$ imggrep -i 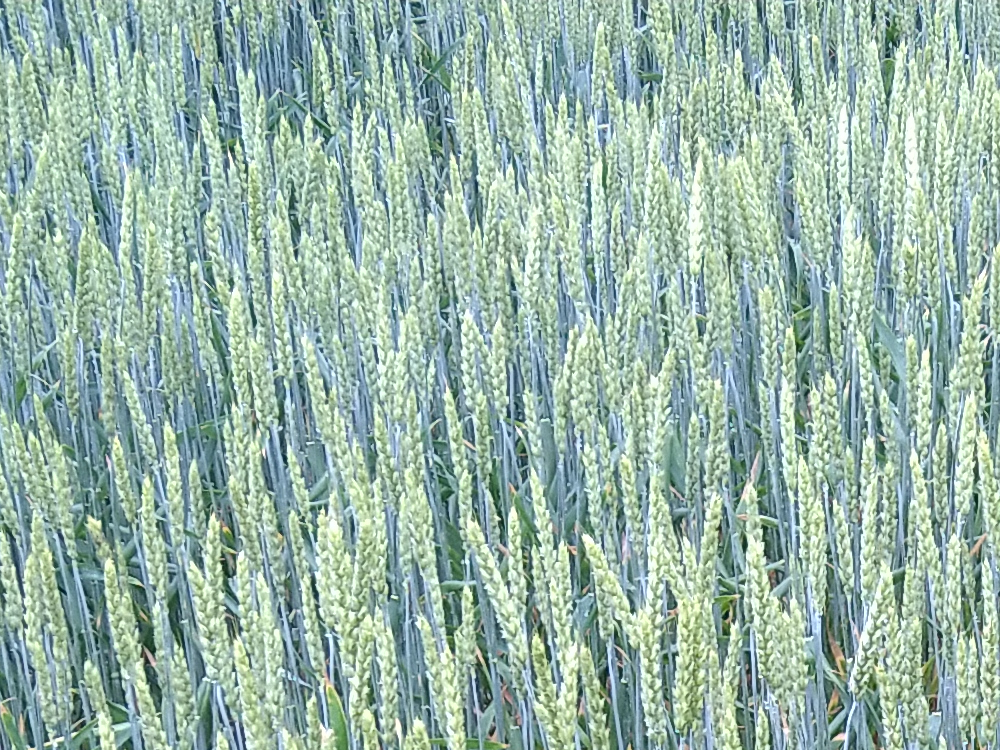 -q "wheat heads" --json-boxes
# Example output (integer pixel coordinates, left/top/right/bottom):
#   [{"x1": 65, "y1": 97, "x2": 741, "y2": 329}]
[
  {"x1": 152, "y1": 132, "x2": 171, "y2": 186},
  {"x1": 228, "y1": 478, "x2": 263, "y2": 569},
  {"x1": 954, "y1": 139, "x2": 971, "y2": 214},
  {"x1": 696, "y1": 56, "x2": 700, "y2": 84},
  {"x1": 883, "y1": 393, "x2": 897, "y2": 465},
  {"x1": 547, "y1": 184, "x2": 567, "y2": 230},
  {"x1": 579, "y1": 5, "x2": 589, "y2": 64},
  {"x1": 22, "y1": 168, "x2": 49, "y2": 254},
  {"x1": 534, "y1": 43, "x2": 543, "y2": 103},
  {"x1": 674, "y1": 603, "x2": 695, "y2": 729},
  {"x1": 158, "y1": 0, "x2": 172, "y2": 61},
  {"x1": 513, "y1": 1, "x2": 524, "y2": 49},
  {"x1": 893, "y1": 0, "x2": 898, "y2": 37},
  {"x1": 615, "y1": 459, "x2": 644, "y2": 553},
  {"x1": 227, "y1": 293, "x2": 251, "y2": 414},
  {"x1": 931, "y1": 0, "x2": 959, "y2": 29},
  {"x1": 670, "y1": 151, "x2": 678, "y2": 179},
  {"x1": 860, "y1": 482, "x2": 876, "y2": 599},
  {"x1": 377, "y1": 0, "x2": 390, "y2": 26},
  {"x1": 810, "y1": 3, "x2": 821, "y2": 35},
  {"x1": 460, "y1": 470, "x2": 471, "y2": 527},
  {"x1": 518, "y1": 73, "x2": 537, "y2": 148},
  {"x1": 550, "y1": 369, "x2": 570, "y2": 454},
  {"x1": 863, "y1": 122, "x2": 878, "y2": 198},
  {"x1": 444, "y1": 219, "x2": 451, "y2": 285},
  {"x1": 355, "y1": 304, "x2": 380, "y2": 387},
  {"x1": 582, "y1": 648, "x2": 610, "y2": 750},
  {"x1": 784, "y1": 327, "x2": 797, "y2": 383},
  {"x1": 12, "y1": 276, "x2": 28, "y2": 380},
  {"x1": 680, "y1": 98, "x2": 692, "y2": 161},
  {"x1": 959, "y1": 67, "x2": 970, "y2": 120},
  {"x1": 545, "y1": 100, "x2": 564, "y2": 205},
  {"x1": 5, "y1": 60, "x2": 26, "y2": 164},
  {"x1": 311, "y1": 202, "x2": 325, "y2": 258},
  {"x1": 0, "y1": 457, "x2": 18, "y2": 534},
  {"x1": 770, "y1": 280, "x2": 785, "y2": 351},
  {"x1": 654, "y1": 350, "x2": 678, "y2": 482},
  {"x1": 833, "y1": 500, "x2": 855, "y2": 590},
  {"x1": 477, "y1": 397, "x2": 491, "y2": 481},
  {"x1": 461, "y1": 311, "x2": 480, "y2": 408},
  {"x1": 718, "y1": 65, "x2": 730, "y2": 134},
  {"x1": 210, "y1": 355, "x2": 222, "y2": 408},
  {"x1": 669, "y1": 175, "x2": 690, "y2": 263},
  {"x1": 578, "y1": 424, "x2": 600, "y2": 534},
  {"x1": 399, "y1": 250, "x2": 423, "y2": 310},
  {"x1": 297, "y1": 230, "x2": 312, "y2": 299},
  {"x1": 145, "y1": 0, "x2": 158, "y2": 64},
  {"x1": 622, "y1": 391, "x2": 631, "y2": 459},
  {"x1": 850, "y1": 568, "x2": 895, "y2": 691},
  {"x1": 115, "y1": 552, "x2": 141, "y2": 651},
  {"x1": 629, "y1": 118, "x2": 645, "y2": 190},
  {"x1": 972, "y1": 71, "x2": 992, "y2": 189},
  {"x1": 538, "y1": 701, "x2": 572, "y2": 750},
  {"x1": 487, "y1": 42, "x2": 495, "y2": 101},
  {"x1": 955, "y1": 397, "x2": 977, "y2": 514},
  {"x1": 168, "y1": 20, "x2": 186, "y2": 100},
  {"x1": 405, "y1": 305, "x2": 422, "y2": 398},
  {"x1": 911, "y1": 59, "x2": 919, "y2": 114},
  {"x1": 50, "y1": 44, "x2": 63, "y2": 79},
  {"x1": 523, "y1": 0, "x2": 535, "y2": 65},
  {"x1": 558, "y1": 661, "x2": 579, "y2": 737},
  {"x1": 903, "y1": 542, "x2": 925, "y2": 617},
  {"x1": 689, "y1": 80, "x2": 705, "y2": 164},
  {"x1": 451, "y1": 155, "x2": 462, "y2": 204},
  {"x1": 205, "y1": 518, "x2": 220, "y2": 633},
  {"x1": 874, "y1": 0, "x2": 885, "y2": 40},
  {"x1": 22, "y1": 555, "x2": 42, "y2": 655},
  {"x1": 640, "y1": 104, "x2": 650, "y2": 141},
  {"x1": 809, "y1": 390, "x2": 825, "y2": 479},
  {"x1": 877, "y1": 140, "x2": 898, "y2": 223},
  {"x1": 836, "y1": 45, "x2": 847, "y2": 107},
  {"x1": 348, "y1": 525, "x2": 372, "y2": 629},
  {"x1": 271, "y1": 275, "x2": 292, "y2": 373},
  {"x1": 545, "y1": 576, "x2": 571, "y2": 649},
  {"x1": 364, "y1": 510, "x2": 389, "y2": 609},
  {"x1": 753, "y1": 707, "x2": 771, "y2": 750},
  {"x1": 797, "y1": 183, "x2": 817, "y2": 260},
  {"x1": 0, "y1": 534, "x2": 24, "y2": 634},
  {"x1": 403, "y1": 472, "x2": 432, "y2": 569},
  {"x1": 464, "y1": 583, "x2": 473, "y2": 645},
  {"x1": 457, "y1": 471, "x2": 470, "y2": 543},
  {"x1": 444, "y1": 658, "x2": 467, "y2": 750},
  {"x1": 460, "y1": 99, "x2": 474, "y2": 202},
  {"x1": 52, "y1": 79, "x2": 71, "y2": 148},
  {"x1": 859, "y1": 441, "x2": 875, "y2": 506},
  {"x1": 933, "y1": 425, "x2": 949, "y2": 524},
  {"x1": 185, "y1": 562, "x2": 219, "y2": 679},
  {"x1": 985, "y1": 0, "x2": 1000, "y2": 29},
  {"x1": 176, "y1": 0, "x2": 197, "y2": 45},
  {"x1": 141, "y1": 477, "x2": 166, "y2": 592},
  {"x1": 173, "y1": 187, "x2": 186, "y2": 275},
  {"x1": 623, "y1": 305, "x2": 638, "y2": 391},
  {"x1": 860, "y1": 240, "x2": 875, "y2": 329},
  {"x1": 227, "y1": 152, "x2": 243, "y2": 236},
  {"x1": 645, "y1": 134, "x2": 657, "y2": 223},
  {"x1": 160, "y1": 306, "x2": 177, "y2": 389},
  {"x1": 132, "y1": 666, "x2": 182, "y2": 750},
  {"x1": 239, "y1": 70, "x2": 254, "y2": 159},
  {"x1": 507, "y1": 162, "x2": 513, "y2": 192},
  {"x1": 69, "y1": 84, "x2": 87, "y2": 171},
  {"x1": 605, "y1": 80, "x2": 619, "y2": 137},
  {"x1": 472, "y1": 225, "x2": 493, "y2": 320},
  {"x1": 392, "y1": 0, "x2": 404, "y2": 32},
  {"x1": 468, "y1": 1, "x2": 479, "y2": 46},
  {"x1": 313, "y1": 261, "x2": 343, "y2": 367},
  {"x1": 660, "y1": 180, "x2": 677, "y2": 266},
  {"x1": 427, "y1": 540, "x2": 448, "y2": 638},
  {"x1": 705, "y1": 252, "x2": 722, "y2": 311},
  {"x1": 693, "y1": 161, "x2": 708, "y2": 274},
  {"x1": 791, "y1": 4, "x2": 807, "y2": 36},
  {"x1": 402, "y1": 386, "x2": 416, "y2": 431},
  {"x1": 152, "y1": 603, "x2": 169, "y2": 688},
  {"x1": 611, "y1": 55, "x2": 626, "y2": 94},
  {"x1": 325, "y1": 187, "x2": 340, "y2": 244},
  {"x1": 443, "y1": 392, "x2": 465, "y2": 473},
  {"x1": 473, "y1": 90, "x2": 495, "y2": 192},
  {"x1": 891, "y1": 159, "x2": 899, "y2": 276},
  {"x1": 884, "y1": 466, "x2": 891, "y2": 564},
  {"x1": 645, "y1": 3, "x2": 665, "y2": 70},
  {"x1": 573, "y1": 100, "x2": 587, "y2": 214},
  {"x1": 748, "y1": 542, "x2": 769, "y2": 680},
  {"x1": 340, "y1": 298, "x2": 357, "y2": 386},
  {"x1": 100, "y1": 326, "x2": 117, "y2": 428},
  {"x1": 903, "y1": 336, "x2": 919, "y2": 427},
  {"x1": 949, "y1": 24, "x2": 962, "y2": 108},
  {"x1": 990, "y1": 402, "x2": 1000, "y2": 488},
  {"x1": 350, "y1": 623, "x2": 375, "y2": 723},
  {"x1": 699, "y1": 495, "x2": 723, "y2": 590},
  {"x1": 530, "y1": 176, "x2": 540, "y2": 209},
  {"x1": 81, "y1": 661, "x2": 110, "y2": 719},
  {"x1": 30, "y1": 512, "x2": 47, "y2": 550},
  {"x1": 728, "y1": 13, "x2": 733, "y2": 59},
  {"x1": 374, "y1": 253, "x2": 396, "y2": 361},
  {"x1": 606, "y1": 534, "x2": 620, "y2": 575},
  {"x1": 287, "y1": 133, "x2": 307, "y2": 200},
  {"x1": 372, "y1": 318, "x2": 397, "y2": 406},
  {"x1": 61, "y1": 0, "x2": 83, "y2": 64},
  {"x1": 824, "y1": 377, "x2": 843, "y2": 467},
  {"x1": 377, "y1": 126, "x2": 388, "y2": 188},
  {"x1": 631, "y1": 188, "x2": 641, "y2": 231},
  {"x1": 50, "y1": 446, "x2": 77, "y2": 556},
  {"x1": 372, "y1": 402, "x2": 397, "y2": 501},
  {"x1": 556, "y1": 93, "x2": 570, "y2": 156},
  {"x1": 267, "y1": 0, "x2": 285, "y2": 25},
  {"x1": 236, "y1": 553, "x2": 259, "y2": 662},
  {"x1": 678, "y1": 141, "x2": 689, "y2": 186},
  {"x1": 118, "y1": 0, "x2": 126, "y2": 21},
  {"x1": 626, "y1": 228, "x2": 638, "y2": 264},
  {"x1": 449, "y1": 57, "x2": 467, "y2": 126},
  {"x1": 860, "y1": 82, "x2": 872, "y2": 176},
  {"x1": 757, "y1": 387, "x2": 774, "y2": 463},
  {"x1": 376, "y1": 613, "x2": 400, "y2": 740},
  {"x1": 70, "y1": 331, "x2": 79, "y2": 417},
  {"x1": 30, "y1": 647, "x2": 59, "y2": 734},
  {"x1": 826, "y1": 72, "x2": 837, "y2": 121},
  {"x1": 252, "y1": 341, "x2": 280, "y2": 424},
  {"x1": 637, "y1": 236, "x2": 654, "y2": 320},
  {"x1": 903, "y1": 621, "x2": 928, "y2": 743},
  {"x1": 350, "y1": 105, "x2": 363, "y2": 209},
  {"x1": 763, "y1": 87, "x2": 782, "y2": 164},
  {"x1": 645, "y1": 489, "x2": 667, "y2": 616},
  {"x1": 454, "y1": 202, "x2": 477, "y2": 306},
  {"x1": 452, "y1": 631, "x2": 471, "y2": 701},
  {"x1": 346, "y1": 256, "x2": 364, "y2": 304},
  {"x1": 759, "y1": 289, "x2": 776, "y2": 379},
  {"x1": 591, "y1": 326, "x2": 603, "y2": 411},
  {"x1": 864, "y1": 43, "x2": 887, "y2": 118},
  {"x1": 405, "y1": 123, "x2": 419, "y2": 182},
  {"x1": 970, "y1": 0, "x2": 978, "y2": 50},
  {"x1": 333, "y1": 42, "x2": 347, "y2": 107},
  {"x1": 319, "y1": 51, "x2": 339, "y2": 128},
  {"x1": 143, "y1": 74, "x2": 178, "y2": 153},
  {"x1": 560, "y1": 225, "x2": 585, "y2": 302},
  {"x1": 67, "y1": 458, "x2": 86, "y2": 523},
  {"x1": 307, "y1": 696, "x2": 327, "y2": 750},
  {"x1": 756, "y1": 81, "x2": 768, "y2": 167},
  {"x1": 190, "y1": 460, "x2": 205, "y2": 537},
  {"x1": 708, "y1": 383, "x2": 729, "y2": 485},
  {"x1": 766, "y1": 597, "x2": 789, "y2": 698},
  {"x1": 564, "y1": 1, "x2": 574, "y2": 38},
  {"x1": 557, "y1": 128, "x2": 568, "y2": 207},
  {"x1": 910, "y1": 449, "x2": 928, "y2": 551},
  {"x1": 880, "y1": 675, "x2": 908, "y2": 750},
  {"x1": 53, "y1": 320, "x2": 68, "y2": 371},
  {"x1": 869, "y1": 344, "x2": 892, "y2": 390},
  {"x1": 717, "y1": 711, "x2": 745, "y2": 750},
  {"x1": 273, "y1": 198, "x2": 307, "y2": 308},
  {"x1": 692, "y1": 7, "x2": 701, "y2": 54},
  {"x1": 121, "y1": 373, "x2": 158, "y2": 466},
  {"x1": 212, "y1": 624, "x2": 240, "y2": 706},
  {"x1": 797, "y1": 0, "x2": 810, "y2": 33},
  {"x1": 592, "y1": 24, "x2": 608, "y2": 101},
  {"x1": 813, "y1": 33, "x2": 827, "y2": 110},
  {"x1": 197, "y1": 0, "x2": 216, "y2": 47},
  {"x1": 288, "y1": 447, "x2": 311, "y2": 520},
  {"x1": 773, "y1": 69, "x2": 803, "y2": 159},
  {"x1": 160, "y1": 274, "x2": 182, "y2": 340},
  {"x1": 656, "y1": 495, "x2": 684, "y2": 590},
  {"x1": 235, "y1": 144, "x2": 247, "y2": 187},
  {"x1": 88, "y1": 519, "x2": 110, "y2": 562},
  {"x1": 302, "y1": 338, "x2": 332, "y2": 440},
  {"x1": 248, "y1": 249, "x2": 269, "y2": 343},
  {"x1": 35, "y1": 397, "x2": 51, "y2": 462},
  {"x1": 814, "y1": 306, "x2": 824, "y2": 374},
  {"x1": 684, "y1": 540, "x2": 700, "y2": 592},
  {"x1": 373, "y1": 476, "x2": 388, "y2": 523},
  {"x1": 617, "y1": 118, "x2": 629, "y2": 180},
  {"x1": 80, "y1": 0, "x2": 97, "y2": 46},
  {"x1": 28, "y1": 0, "x2": 45, "y2": 37},
  {"x1": 723, "y1": 622, "x2": 740, "y2": 699},
  {"x1": 0, "y1": 410, "x2": 13, "y2": 485},
  {"x1": 364, "y1": 0, "x2": 379, "y2": 82},
  {"x1": 520, "y1": 198, "x2": 545, "y2": 305},
  {"x1": 533, "y1": 141, "x2": 544, "y2": 208},
  {"x1": 411, "y1": 21, "x2": 424, "y2": 65},
  {"x1": 55, "y1": 646, "x2": 72, "y2": 715},
  {"x1": 394, "y1": 134, "x2": 408, "y2": 239},
  {"x1": 382, "y1": 54, "x2": 394, "y2": 111},
  {"x1": 702, "y1": 3, "x2": 718, "y2": 46},
  {"x1": 991, "y1": 247, "x2": 1000, "y2": 334},
  {"x1": 605, "y1": 311, "x2": 617, "y2": 391},
  {"x1": 220, "y1": 422, "x2": 232, "y2": 471},
  {"x1": 0, "y1": 83, "x2": 4, "y2": 137},
  {"x1": 360, "y1": 710, "x2": 387, "y2": 750},
  {"x1": 427, "y1": 214, "x2": 441, "y2": 301},
  {"x1": 407, "y1": 412, "x2": 426, "y2": 492},
  {"x1": 819, "y1": 0, "x2": 830, "y2": 37},
  {"x1": 96, "y1": 143, "x2": 121, "y2": 204},
  {"x1": 0, "y1": 131, "x2": 9, "y2": 192},
  {"x1": 323, "y1": 160, "x2": 338, "y2": 187},
  {"x1": 978, "y1": 0, "x2": 990, "y2": 54},
  {"x1": 79, "y1": 66, "x2": 94, "y2": 117},
  {"x1": 632, "y1": 358, "x2": 653, "y2": 469},
  {"x1": 958, "y1": 54, "x2": 985, "y2": 153},
  {"x1": 591, "y1": 162, "x2": 604, "y2": 267},
  {"x1": 905, "y1": 117, "x2": 921, "y2": 242},
  {"x1": 904, "y1": 0, "x2": 917, "y2": 35},
  {"x1": 532, "y1": 634, "x2": 555, "y2": 710},
  {"x1": 263, "y1": 499, "x2": 287, "y2": 578},
  {"x1": 508, "y1": 508, "x2": 524, "y2": 604},
  {"x1": 843, "y1": 240, "x2": 867, "y2": 330},
  {"x1": 122, "y1": 263, "x2": 136, "y2": 339},
  {"x1": 512, "y1": 255, "x2": 524, "y2": 308},
  {"x1": 800, "y1": 36, "x2": 813, "y2": 113},
  {"x1": 329, "y1": 516, "x2": 341, "y2": 578},
  {"x1": 401, "y1": 59, "x2": 416, "y2": 115},
  {"x1": 774, "y1": 0, "x2": 791, "y2": 37},
  {"x1": 934, "y1": 115, "x2": 953, "y2": 220},
  {"x1": 481, "y1": 183, "x2": 500, "y2": 274},
  {"x1": 360, "y1": 115, "x2": 378, "y2": 173},
  {"x1": 744, "y1": 489, "x2": 758, "y2": 543},
  {"x1": 261, "y1": 1, "x2": 272, "y2": 34},
  {"x1": 911, "y1": 89, "x2": 927, "y2": 163},
  {"x1": 543, "y1": 27, "x2": 553, "y2": 59},
  {"x1": 34, "y1": 31, "x2": 52, "y2": 89},
  {"x1": 694, "y1": 344, "x2": 702, "y2": 400},
  {"x1": 810, "y1": 118, "x2": 822, "y2": 165},
  {"x1": 164, "y1": 422, "x2": 184, "y2": 540},
  {"x1": 111, "y1": 439, "x2": 135, "y2": 521},
  {"x1": 51, "y1": 154, "x2": 74, "y2": 231},
  {"x1": 245, "y1": 0, "x2": 260, "y2": 56},
  {"x1": 418, "y1": 114, "x2": 435, "y2": 200},
  {"x1": 103, "y1": 561, "x2": 126, "y2": 664},
  {"x1": 409, "y1": 161, "x2": 426, "y2": 226},
  {"x1": 530, "y1": 473, "x2": 556, "y2": 562},
  {"x1": 592, "y1": 426, "x2": 620, "y2": 510},
  {"x1": 496, "y1": 63, "x2": 524, "y2": 151},
  {"x1": 583, "y1": 536, "x2": 635, "y2": 643},
  {"x1": 840, "y1": 111, "x2": 848, "y2": 198},
  {"x1": 78, "y1": 235, "x2": 91, "y2": 334},
  {"x1": 833, "y1": 0, "x2": 843, "y2": 42},
  {"x1": 903, "y1": 501, "x2": 921, "y2": 564},
  {"x1": 124, "y1": 100, "x2": 152, "y2": 165},
  {"x1": 700, "y1": 311, "x2": 716, "y2": 352},
  {"x1": 789, "y1": 603, "x2": 808, "y2": 693},
  {"x1": 613, "y1": 6, "x2": 623, "y2": 59},
  {"x1": 982, "y1": 558, "x2": 998, "y2": 640},
  {"x1": 543, "y1": 234, "x2": 562, "y2": 299},
  {"x1": 191, "y1": 263, "x2": 212, "y2": 348},
  {"x1": 465, "y1": 523, "x2": 523, "y2": 648},
  {"x1": 588, "y1": 118, "x2": 597, "y2": 161},
  {"x1": 428, "y1": 361, "x2": 438, "y2": 397},
  {"x1": 506, "y1": 58, "x2": 516, "y2": 104},
  {"x1": 843, "y1": 12, "x2": 861, "y2": 65},
  {"x1": 778, "y1": 36, "x2": 794, "y2": 76},
  {"x1": 24, "y1": 49, "x2": 45, "y2": 144},
  {"x1": 288, "y1": 513, "x2": 310, "y2": 581},
  {"x1": 492, "y1": 320, "x2": 505, "y2": 414},
  {"x1": 810, "y1": 498, "x2": 822, "y2": 609},
  {"x1": 742, "y1": 167, "x2": 775, "y2": 256},
  {"x1": 130, "y1": 1, "x2": 140, "y2": 36},
  {"x1": 177, "y1": 142, "x2": 185, "y2": 184},
  {"x1": 709, "y1": 73, "x2": 719, "y2": 139},
  {"x1": 640, "y1": 260, "x2": 654, "y2": 327},
  {"x1": 234, "y1": 641, "x2": 270, "y2": 750},
  {"x1": 969, "y1": 196, "x2": 983, "y2": 277},
  {"x1": 277, "y1": 112, "x2": 290, "y2": 201},
  {"x1": 529, "y1": 550, "x2": 551, "y2": 627},
  {"x1": 113, "y1": 100, "x2": 127, "y2": 178},
  {"x1": 694, "y1": 601, "x2": 715, "y2": 699},
  {"x1": 917, "y1": 348, "x2": 932, "y2": 456},
  {"x1": 622, "y1": 4, "x2": 638, "y2": 62},
  {"x1": 717, "y1": 277, "x2": 732, "y2": 348},
  {"x1": 144, "y1": 223, "x2": 161, "y2": 333},
  {"x1": 455, "y1": 0, "x2": 460, "y2": 34},
  {"x1": 676, "y1": 306, "x2": 701, "y2": 368},
  {"x1": 256, "y1": 98, "x2": 268, "y2": 148},
  {"x1": 247, "y1": 162, "x2": 265, "y2": 264},
  {"x1": 117, "y1": 173, "x2": 133, "y2": 261},
  {"x1": 260, "y1": 140, "x2": 273, "y2": 196},
  {"x1": 420, "y1": 618, "x2": 443, "y2": 730},
  {"x1": 504, "y1": 4, "x2": 530, "y2": 86},
  {"x1": 364, "y1": 204, "x2": 386, "y2": 275},
  {"x1": 177, "y1": 318, "x2": 192, "y2": 397},
  {"x1": 302, "y1": 110, "x2": 311, "y2": 143},
  {"x1": 943, "y1": 539, "x2": 963, "y2": 630},
  {"x1": 156, "y1": 182, "x2": 167, "y2": 264},
  {"x1": 751, "y1": 112, "x2": 761, "y2": 161},
  {"x1": 190, "y1": 142, "x2": 198, "y2": 206},
  {"x1": 313, "y1": 37, "x2": 321, "y2": 104},
  {"x1": 610, "y1": 205, "x2": 625, "y2": 288},
  {"x1": 675, "y1": 43, "x2": 687, "y2": 89},
  {"x1": 710, "y1": 651, "x2": 720, "y2": 728},
  {"x1": 302, "y1": 140, "x2": 324, "y2": 223},
  {"x1": 205, "y1": 213, "x2": 230, "y2": 293},
  {"x1": 41, "y1": 553, "x2": 68, "y2": 655},
  {"x1": 136, "y1": 182, "x2": 149, "y2": 261},
  {"x1": 733, "y1": 286, "x2": 742, "y2": 339},
  {"x1": 775, "y1": 34, "x2": 784, "y2": 67},
  {"x1": 887, "y1": 43, "x2": 909, "y2": 141},
  {"x1": 594, "y1": 569, "x2": 616, "y2": 642},
  {"x1": 961, "y1": 0, "x2": 968, "y2": 32},
  {"x1": 626, "y1": 100, "x2": 634, "y2": 137},
  {"x1": 687, "y1": 415, "x2": 701, "y2": 516},
  {"x1": 93, "y1": 43, "x2": 111, "y2": 115},
  {"x1": 334, "y1": 337, "x2": 353, "y2": 406},
  {"x1": 395, "y1": 494, "x2": 413, "y2": 579},
  {"x1": 829, "y1": 284, "x2": 842, "y2": 365},
  {"x1": 658, "y1": 3, "x2": 674, "y2": 40},
  {"x1": 746, "y1": 2, "x2": 757, "y2": 73},
  {"x1": 928, "y1": 544, "x2": 943, "y2": 625},
  {"x1": 930, "y1": 65, "x2": 945, "y2": 154},
  {"x1": 613, "y1": 269, "x2": 633, "y2": 363},
  {"x1": 714, "y1": 178, "x2": 730, "y2": 251},
  {"x1": 858, "y1": 5, "x2": 869, "y2": 64},
  {"x1": 264, "y1": 215, "x2": 283, "y2": 278},
  {"x1": 791, "y1": 148, "x2": 803, "y2": 180},
  {"x1": 272, "y1": 137, "x2": 282, "y2": 184},
  {"x1": 919, "y1": 235, "x2": 932, "y2": 333},
  {"x1": 977, "y1": 434, "x2": 1000, "y2": 556},
  {"x1": 328, "y1": 412, "x2": 364, "y2": 515},
  {"x1": 495, "y1": 179, "x2": 524, "y2": 266},
  {"x1": 249, "y1": 446, "x2": 267, "y2": 527},
  {"x1": 854, "y1": 331, "x2": 876, "y2": 417},
  {"x1": 476, "y1": 334, "x2": 494, "y2": 395},
  {"x1": 559, "y1": 543, "x2": 574, "y2": 620},
  {"x1": 352, "y1": 441, "x2": 371, "y2": 516},
  {"x1": 845, "y1": 222, "x2": 852, "y2": 285},
  {"x1": 898, "y1": 237, "x2": 916, "y2": 327},
  {"x1": 956, "y1": 637, "x2": 978, "y2": 737},
  {"x1": 183, "y1": 179, "x2": 200, "y2": 260},
  {"x1": 922, "y1": 197, "x2": 940, "y2": 306},
  {"x1": 524, "y1": 391, "x2": 544, "y2": 470},
  {"x1": 658, "y1": 45, "x2": 679, "y2": 131},
  {"x1": 782, "y1": 35, "x2": 791, "y2": 81},
  {"x1": 495, "y1": 220, "x2": 513, "y2": 318},
  {"x1": 813, "y1": 171, "x2": 833, "y2": 245},
  {"x1": 568, "y1": 0, "x2": 582, "y2": 64},
  {"x1": 350, "y1": 442, "x2": 376, "y2": 509},
  {"x1": 117, "y1": 26, "x2": 136, "y2": 89},
  {"x1": 564, "y1": 325, "x2": 579, "y2": 399},
  {"x1": 233, "y1": 406, "x2": 249, "y2": 491},
  {"x1": 638, "y1": 610, "x2": 661, "y2": 739},
  {"x1": 74, "y1": 165, "x2": 96, "y2": 233},
  {"x1": 99, "y1": 14, "x2": 116, "y2": 73},
  {"x1": 469, "y1": 24, "x2": 475, "y2": 84},
  {"x1": 992, "y1": 25, "x2": 1000, "y2": 66},
  {"x1": 925, "y1": 12, "x2": 948, "y2": 71},
  {"x1": 957, "y1": 279, "x2": 986, "y2": 392},
  {"x1": 532, "y1": 0, "x2": 546, "y2": 38},
  {"x1": 414, "y1": 722, "x2": 441, "y2": 750},
  {"x1": 669, "y1": 277, "x2": 684, "y2": 368},
  {"x1": 607, "y1": 145, "x2": 620, "y2": 207},
  {"x1": 54, "y1": 228, "x2": 71, "y2": 322},
  {"x1": 26, "y1": 431, "x2": 49, "y2": 506},
  {"x1": 99, "y1": 1, "x2": 112, "y2": 22},
  {"x1": 727, "y1": 7, "x2": 747, "y2": 48},
  {"x1": 982, "y1": 627, "x2": 1000, "y2": 734},
  {"x1": 12, "y1": 420, "x2": 30, "y2": 490},
  {"x1": 828, "y1": 118, "x2": 838, "y2": 217},
  {"x1": 88, "y1": 231, "x2": 108, "y2": 334},
  {"x1": 104, "y1": 243, "x2": 121, "y2": 321},
  {"x1": 918, "y1": 0, "x2": 931, "y2": 55},
  {"x1": 2, "y1": 0, "x2": 21, "y2": 38},
  {"x1": 385, "y1": 164, "x2": 404, "y2": 253},
  {"x1": 317, "y1": 512, "x2": 336, "y2": 623},
  {"x1": 947, "y1": 371, "x2": 962, "y2": 448},
  {"x1": 530, "y1": 303, "x2": 543, "y2": 354},
  {"x1": 934, "y1": 187, "x2": 954, "y2": 267},
  {"x1": 843, "y1": 445, "x2": 857, "y2": 518},
  {"x1": 778, "y1": 613, "x2": 798, "y2": 696},
  {"x1": 97, "y1": 713, "x2": 126, "y2": 750},
  {"x1": 973, "y1": 337, "x2": 987, "y2": 408},
  {"x1": 549, "y1": 0, "x2": 561, "y2": 43},
  {"x1": 543, "y1": 300, "x2": 559, "y2": 380},
  {"x1": 715, "y1": 20, "x2": 727, "y2": 60},
  {"x1": 200, "y1": 38, "x2": 215, "y2": 114},
  {"x1": 684, "y1": 5, "x2": 696, "y2": 53},
  {"x1": 599, "y1": 0, "x2": 611, "y2": 46},
  {"x1": 651, "y1": 173, "x2": 660, "y2": 254},
  {"x1": 849, "y1": 114, "x2": 865, "y2": 205},
  {"x1": 203, "y1": 119, "x2": 227, "y2": 218},
  {"x1": 570, "y1": 323, "x2": 588, "y2": 416},
  {"x1": 723, "y1": 184, "x2": 748, "y2": 272},
  {"x1": 516, "y1": 180, "x2": 530, "y2": 220},
  {"x1": 300, "y1": 577, "x2": 325, "y2": 677},
  {"x1": 3, "y1": 212, "x2": 22, "y2": 320},
  {"x1": 171, "y1": 644, "x2": 198, "y2": 750},
  {"x1": 794, "y1": 455, "x2": 810, "y2": 564},
  {"x1": 261, "y1": 587, "x2": 284, "y2": 729},
  {"x1": 486, "y1": 492, "x2": 501, "y2": 550},
  {"x1": 736, "y1": 51, "x2": 745, "y2": 131},
  {"x1": 521, "y1": 302, "x2": 533, "y2": 385},
  {"x1": 780, "y1": 385, "x2": 796, "y2": 493},
  {"x1": 337, "y1": 552, "x2": 352, "y2": 624},
  {"x1": 980, "y1": 95, "x2": 1000, "y2": 191},
  {"x1": 750, "y1": 272, "x2": 760, "y2": 347},
  {"x1": 392, "y1": 323, "x2": 409, "y2": 418},
  {"x1": 163, "y1": 64, "x2": 172, "y2": 123},
  {"x1": 20, "y1": 278, "x2": 48, "y2": 349},
  {"x1": 429, "y1": 1, "x2": 439, "y2": 46}
]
